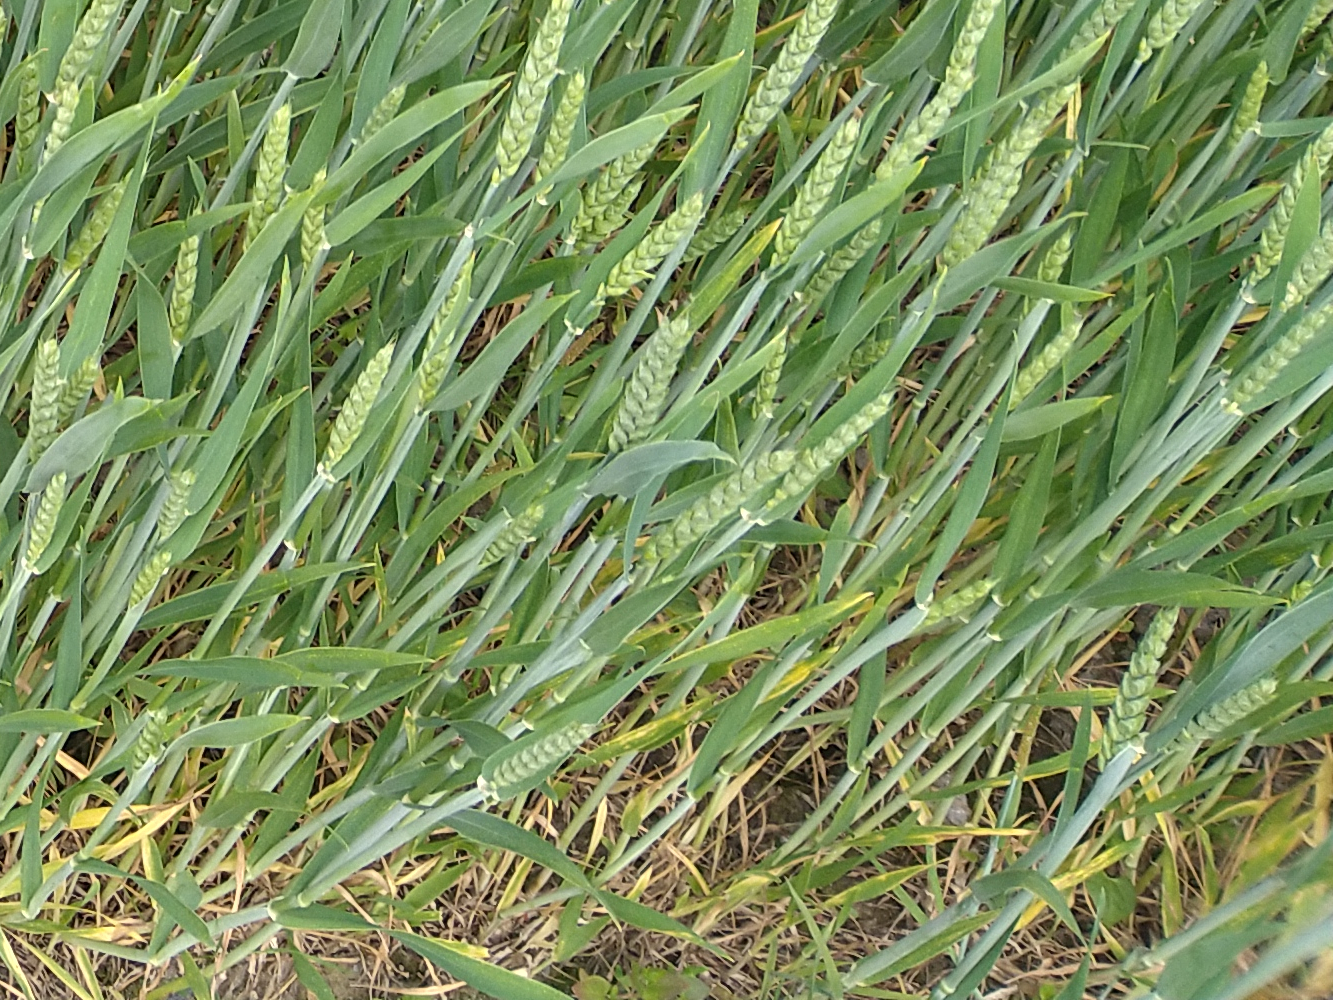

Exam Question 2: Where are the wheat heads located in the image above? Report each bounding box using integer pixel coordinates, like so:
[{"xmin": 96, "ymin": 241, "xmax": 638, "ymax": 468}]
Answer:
[
  {"xmin": 969, "ymin": 84, "xmax": 1075, "ymax": 193},
  {"xmin": 69, "ymin": 175, "xmax": 133, "ymax": 267},
  {"xmin": 539, "ymin": 74, "xmax": 589, "ymax": 178},
  {"xmin": 738, "ymin": 0, "xmax": 844, "ymax": 146},
  {"xmin": 55, "ymin": 0, "xmax": 127, "ymax": 102},
  {"xmin": 246, "ymin": 105, "xmax": 290, "ymax": 249},
  {"xmin": 937, "ymin": 0, "xmax": 1036, "ymax": 94},
  {"xmin": 686, "ymin": 206, "xmax": 754, "ymax": 255},
  {"xmin": 1187, "ymin": 679, "xmax": 1281, "ymax": 741},
  {"xmin": 321, "ymin": 337, "xmax": 395, "ymax": 470},
  {"xmin": 49, "ymin": 82, "xmax": 83, "ymax": 156},
  {"xmin": 1299, "ymin": 0, "xmax": 1333, "ymax": 35},
  {"xmin": 564, "ymin": 130, "xmax": 667, "ymax": 237},
  {"xmin": 756, "ymin": 330, "xmax": 790, "ymax": 392},
  {"xmin": 879, "ymin": 75, "xmax": 974, "ymax": 183},
  {"xmin": 1108, "ymin": 610, "xmax": 1180, "ymax": 764},
  {"xmin": 488, "ymin": 0, "xmax": 573, "ymax": 183},
  {"xmin": 575, "ymin": 186, "xmax": 641, "ymax": 255},
  {"xmin": 1053, "ymin": 0, "xmax": 1150, "ymax": 72},
  {"xmin": 635, "ymin": 443, "xmax": 791, "ymax": 573},
  {"xmin": 608, "ymin": 325, "xmax": 697, "ymax": 449},
  {"xmin": 1005, "ymin": 314, "xmax": 1087, "ymax": 404},
  {"xmin": 813, "ymin": 218, "xmax": 884, "ymax": 295},
  {"xmin": 766, "ymin": 390, "xmax": 899, "ymax": 505},
  {"xmin": 1281, "ymin": 219, "xmax": 1333, "ymax": 309},
  {"xmin": 134, "ymin": 708, "xmax": 167, "ymax": 770},
  {"xmin": 1242, "ymin": 131, "xmax": 1333, "ymax": 286},
  {"xmin": 136, "ymin": 552, "xmax": 171, "ymax": 594},
  {"xmin": 22, "ymin": 50, "xmax": 41, "ymax": 166},
  {"xmin": 354, "ymin": 85, "xmax": 407, "ymax": 156},
  {"xmin": 1227, "ymin": 305, "xmax": 1333, "ymax": 402},
  {"xmin": 56, "ymin": 367, "xmax": 103, "ymax": 429},
  {"xmin": 766, "ymin": 119, "xmax": 857, "ymax": 265},
  {"xmin": 31, "ymin": 340, "xmax": 62, "ymax": 440},
  {"xmin": 22, "ymin": 473, "xmax": 68, "ymax": 560},
  {"xmin": 928, "ymin": 580, "xmax": 997, "ymax": 617},
  {"xmin": 601, "ymin": 199, "xmax": 701, "ymax": 293},
  {"xmin": 1231, "ymin": 65, "xmax": 1270, "ymax": 147},
  {"xmin": 491, "ymin": 722, "xmax": 601, "ymax": 785},
  {"xmin": 167, "ymin": 236, "xmax": 196, "ymax": 331},
  {"xmin": 1040, "ymin": 234, "xmax": 1072, "ymax": 281},
  {"xmin": 944, "ymin": 163, "xmax": 1021, "ymax": 265},
  {"xmin": 1143, "ymin": 0, "xmax": 1255, "ymax": 59},
  {"xmin": 158, "ymin": 483, "xmax": 189, "ymax": 538},
  {"xmin": 479, "ymin": 510, "xmax": 547, "ymax": 568},
  {"xmin": 304, "ymin": 205, "xmax": 326, "ymax": 264},
  {"xmin": 411, "ymin": 264, "xmax": 471, "ymax": 414}
]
